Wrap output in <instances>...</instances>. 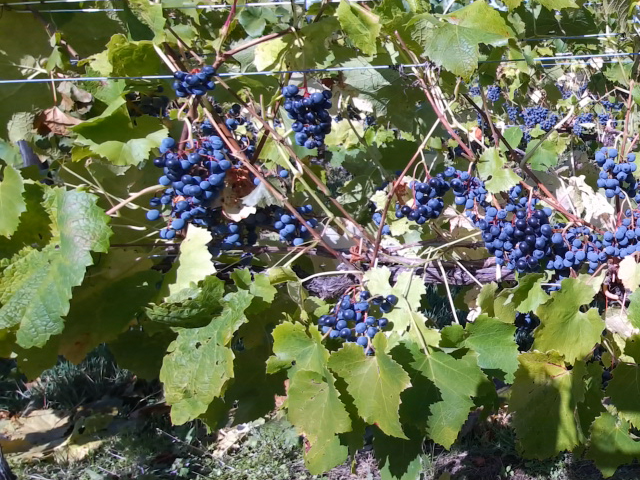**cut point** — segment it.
Masks as SVG:
<instances>
[{"instance_id":"6a23745f","label":"cut point","mask_w":640,"mask_h":480,"mask_svg":"<svg viewBox=\"0 0 640 480\" xmlns=\"http://www.w3.org/2000/svg\"><path fill=\"white\" fill-rule=\"evenodd\" d=\"M293 34H294V36H295V37H296V39H297L298 49H299V51H300V55H301L302 57H305V56H306V52H305V48L303 47V40H302V37H301V35H300L299 31H298V30H296L295 32H293Z\"/></svg>"}]
</instances>
